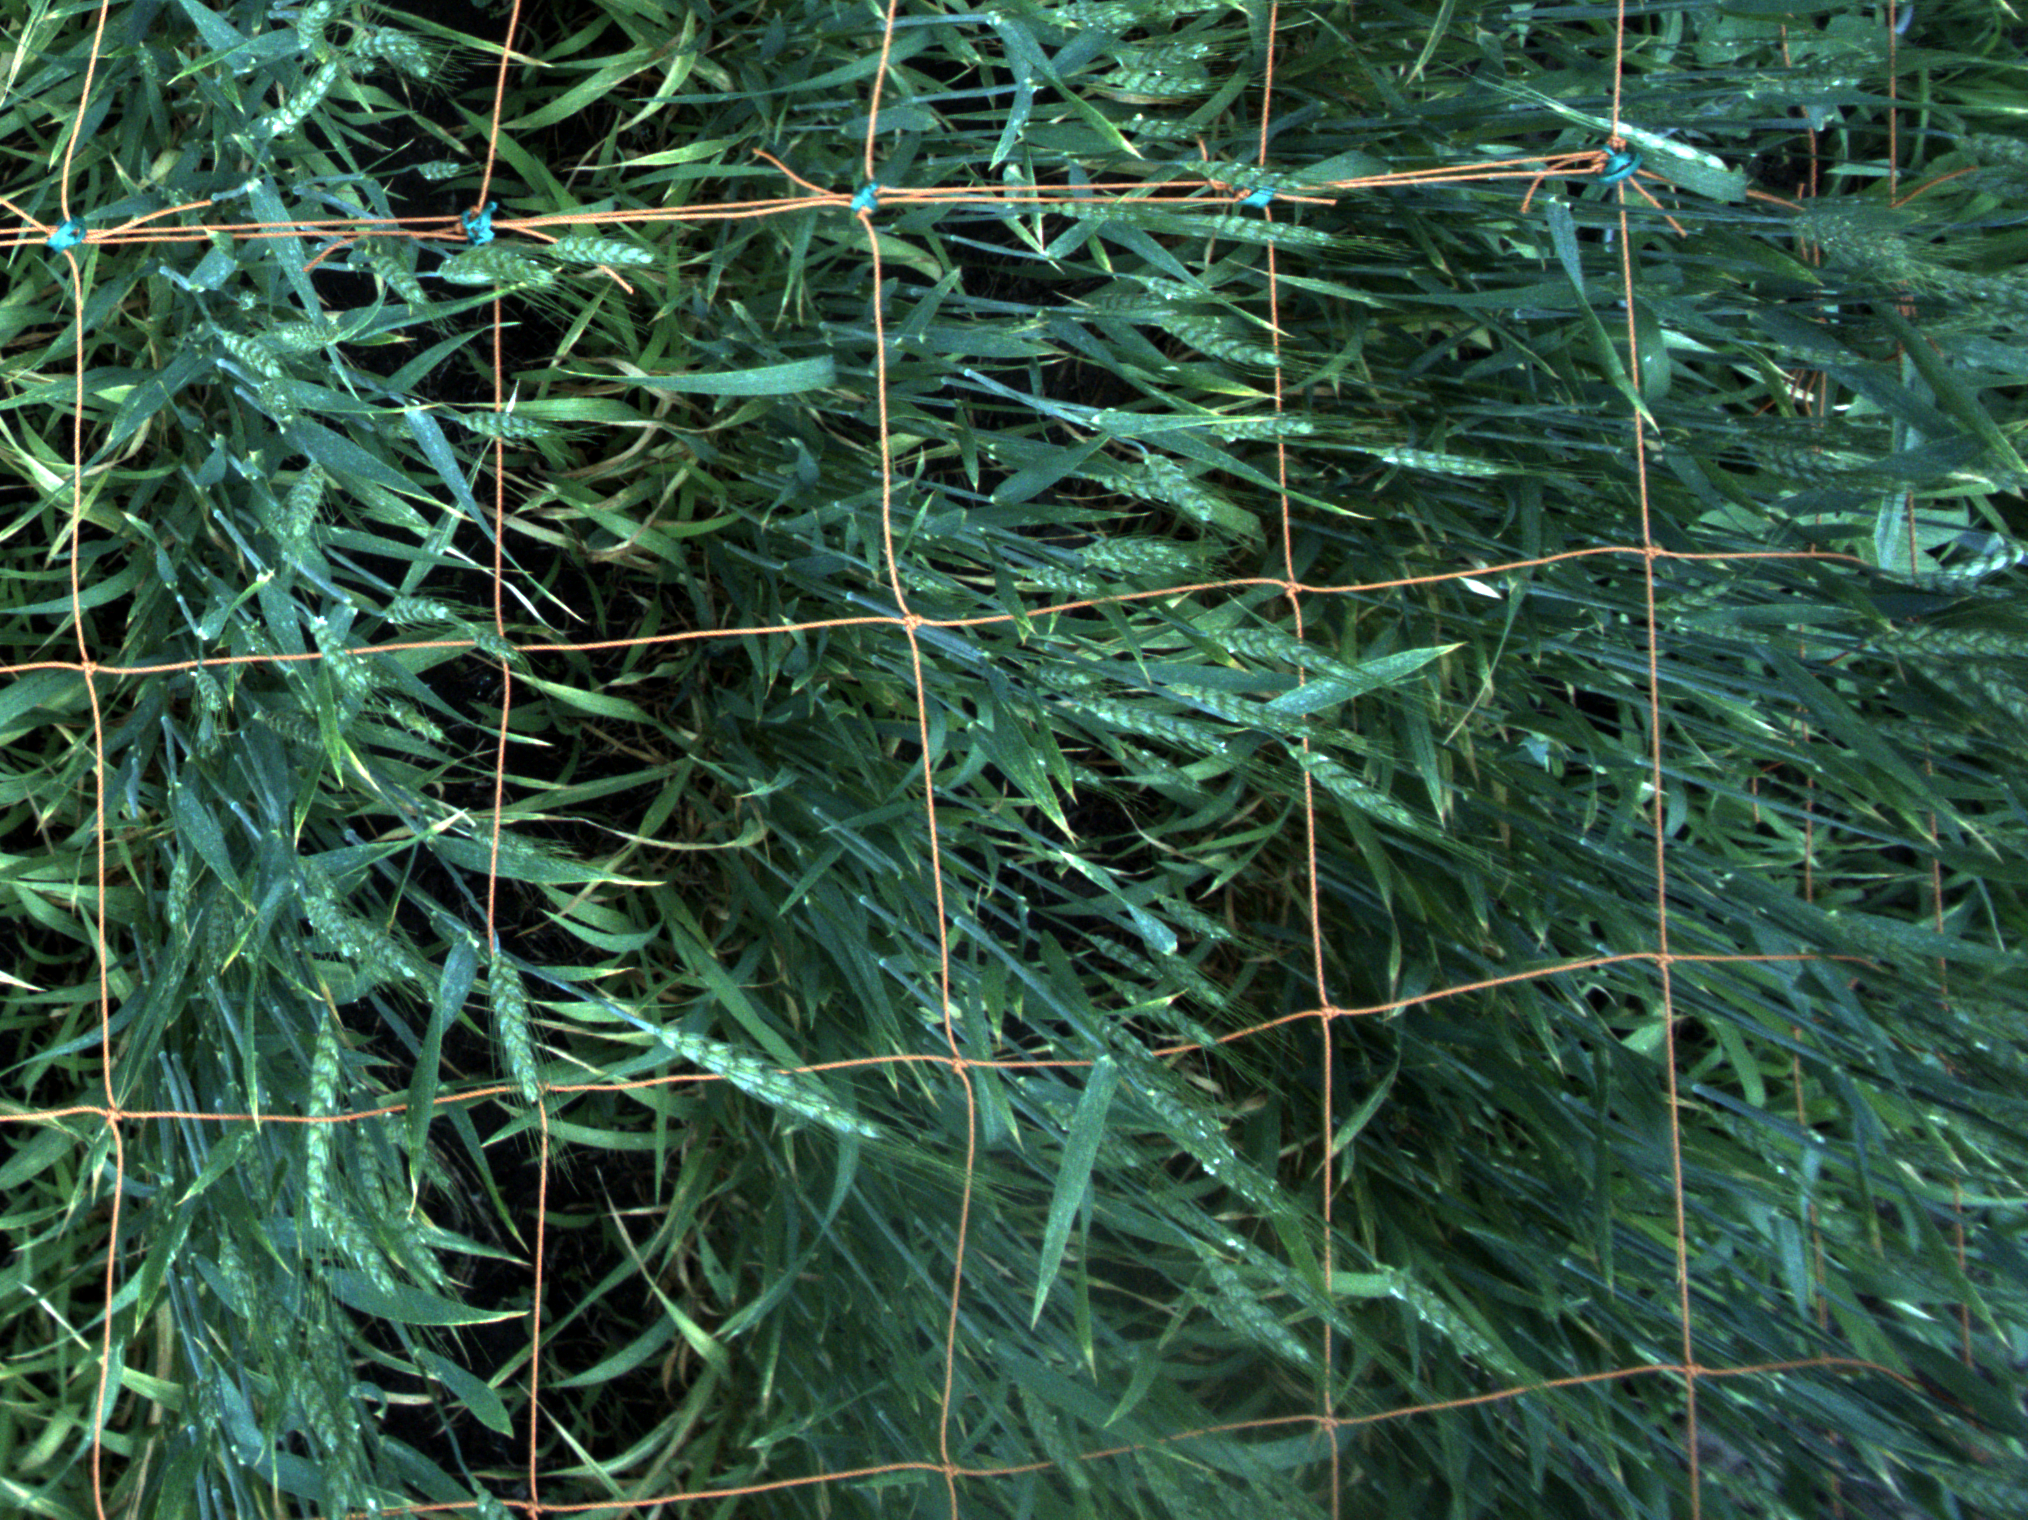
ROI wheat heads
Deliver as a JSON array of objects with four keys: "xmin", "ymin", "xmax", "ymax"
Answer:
[
  {"xmin": 239, "ymin": 1138, "xmax": 267, "ymax": 1207},
  {"xmin": 1973, "ymin": 659, "xmax": 2024, "ymax": 723},
  {"xmin": 648, "ymin": 1017, "xmax": 883, "ymax": 1140},
  {"xmin": 1562, "ymin": 487, "xmax": 1621, "ymax": 517},
  {"xmin": 267, "ymin": 506, "xmax": 285, "ymax": 538},
  {"xmin": 1150, "ymin": 277, "xmax": 1198, "ymax": 300},
  {"xmin": 1933, "ymin": 537, "xmax": 2024, "ymax": 579},
  {"xmin": 1749, "ymin": 55, "xmax": 1879, "ymax": 100},
  {"xmin": 217, "ymin": 1230, "xmax": 250, "ymax": 1305},
  {"xmin": 309, "ymin": 609, "xmax": 368, "ymax": 689},
  {"xmin": 470, "ymin": 623, "xmax": 519, "ymax": 662},
  {"xmin": 1873, "ymin": 1003, "xmax": 1965, "ymax": 1058},
  {"xmin": 1171, "ymin": 1136, "xmax": 1283, "ymax": 1203},
  {"xmin": 461, "ymin": 411, "xmax": 539, "ymax": 440},
  {"xmin": 468, "ymin": 823, "xmax": 536, "ymax": 856},
  {"xmin": 1757, "ymin": 420, "xmax": 1856, "ymax": 449},
  {"xmin": 1220, "ymin": 1228, "xmax": 1349, "ymax": 1334},
  {"xmin": 1696, "ymin": 38, "xmax": 1775, "ymax": 50},
  {"xmin": 197, "ymin": 664, "xmax": 224, "ymax": 710},
  {"xmin": 1109, "ymin": 67, "xmax": 1207, "ymax": 101},
  {"xmin": 209, "ymin": 885, "xmax": 236, "ymax": 970},
  {"xmin": 1017, "ymin": 1380, "xmax": 1092, "ymax": 1488},
  {"xmin": 265, "ymin": 705, "xmax": 325, "ymax": 746},
  {"xmin": 1218, "ymin": 416, "xmax": 1315, "ymax": 444},
  {"xmin": 1883, "ymin": 1134, "xmax": 2002, "ymax": 1185},
  {"xmin": 1755, "ymin": 437, "xmax": 1849, "ymax": 469},
  {"xmin": 1756, "ymin": 456, "xmax": 1903, "ymax": 488},
  {"xmin": 1072, "ymin": 690, "xmax": 1227, "ymax": 756},
  {"xmin": 1816, "ymin": 234, "xmax": 1908, "ymax": 273},
  {"xmin": 1838, "ymin": 313, "xmax": 1965, "ymax": 346},
  {"xmin": 1078, "ymin": 9, "xmax": 1139, "ymax": 34},
  {"xmin": 295, "ymin": 0, "xmax": 332, "ymax": 50},
  {"xmin": 345, "ymin": 914, "xmax": 415, "ymax": 982},
  {"xmin": 286, "ymin": 463, "xmax": 329, "ymax": 537},
  {"xmin": 1042, "ymin": 1099, "xmax": 1143, "ymax": 1170},
  {"xmin": 1288, "ymin": 743, "xmax": 1417, "ymax": 831},
  {"xmin": 1031, "ymin": 745, "xmax": 1099, "ymax": 784},
  {"xmin": 1127, "ymin": 1445, "xmax": 1208, "ymax": 1516},
  {"xmin": 1215, "ymin": 1478, "xmax": 1258, "ymax": 1516},
  {"xmin": 383, "ymin": 594, "xmax": 451, "ymax": 626},
  {"xmin": 385, "ymin": 1175, "xmax": 446, "ymax": 1288},
  {"xmin": 1122, "ymin": 120, "xmax": 1202, "ymax": 146},
  {"xmin": 1795, "ymin": 208, "xmax": 1856, "ymax": 239},
  {"xmin": 1088, "ymin": 932, "xmax": 1167, "ymax": 981},
  {"xmin": 440, "ymin": 261, "xmax": 494, "ymax": 284},
  {"xmin": 1117, "ymin": 1055, "xmax": 1205, "ymax": 1140},
  {"xmin": 376, "ymin": 22, "xmax": 429, "ymax": 80},
  {"xmin": 1157, "ymin": 0, "xmax": 1305, "ymax": 20},
  {"xmin": 267, "ymin": 61, "xmax": 338, "ymax": 140},
  {"xmin": 1025, "ymin": 660, "xmax": 1090, "ymax": 690},
  {"xmin": 1873, "ymin": 715, "xmax": 1967, "ymax": 751},
  {"xmin": 1386, "ymin": 1262, "xmax": 1515, "ymax": 1378},
  {"xmin": 1973, "ymin": 163, "xmax": 2027, "ymax": 201},
  {"xmin": 1380, "ymin": 442, "xmax": 1499, "ymax": 481},
  {"xmin": 1088, "ymin": 291, "xmax": 1161, "ymax": 320},
  {"xmin": 1780, "ymin": 338, "xmax": 1863, "ymax": 367},
  {"xmin": 352, "ymin": 1117, "xmax": 385, "ymax": 1222},
  {"xmin": 1925, "ymin": 263, "xmax": 2024, "ymax": 308},
  {"xmin": 192, "ymin": 1373, "xmax": 222, "ymax": 1440},
  {"xmin": 389, "ymin": 701, "xmax": 445, "ymax": 744},
  {"xmin": 1599, "ymin": 116, "xmax": 1727, "ymax": 171},
  {"xmin": 1049, "ymin": 203, "xmax": 1139, "ymax": 226},
  {"xmin": 290, "ymin": 1357, "xmax": 338, "ymax": 1448},
  {"xmin": 323, "ymin": 1400, "xmax": 360, "ymax": 1515},
  {"xmin": 379, "ymin": 414, "xmax": 417, "ymax": 442},
  {"xmin": 1086, "ymin": 1013, "xmax": 1156, "ymax": 1066},
  {"xmin": 1076, "ymin": 540, "xmax": 1191, "ymax": 580},
  {"xmin": 242, "ymin": 624, "xmax": 274, "ymax": 654},
  {"xmin": 310, "ymin": 1316, "xmax": 351, "ymax": 1396},
  {"xmin": 168, "ymin": 1213, "xmax": 192, "ymax": 1265},
  {"xmin": 1150, "ymin": 887, "xmax": 1238, "ymax": 941},
  {"xmin": 1598, "ymin": 280, "xmax": 1670, "ymax": 301},
  {"xmin": 1971, "ymin": 1093, "xmax": 2024, "ymax": 1136},
  {"xmin": 1854, "ymin": 1232, "xmax": 1965, "ymax": 1303},
  {"xmin": 236, "ymin": 290, "xmax": 258, "ymax": 313},
  {"xmin": 455, "ymin": 243, "xmax": 554, "ymax": 291},
  {"xmin": 1931, "ymin": 1463, "xmax": 2027, "ymax": 1516},
  {"xmin": 1948, "ymin": 992, "xmax": 2026, "ymax": 1037},
  {"xmin": 1196, "ymin": 158, "xmax": 1299, "ymax": 195},
  {"xmin": 1829, "ymin": 912, "xmax": 1918, "ymax": 971},
  {"xmin": 322, "ymin": 1204, "xmax": 395, "ymax": 1298},
  {"xmin": 1249, "ymin": 1455, "xmax": 1327, "ymax": 1518},
  {"xmin": 1100, "ymin": 472, "xmax": 1172, "ymax": 506},
  {"xmin": 166, "ymin": 851, "xmax": 191, "ymax": 923},
  {"xmin": 1684, "ymin": 617, "xmax": 1770, "ymax": 644},
  {"xmin": 1185, "ymin": 1289, "xmax": 1256, "ymax": 1339},
  {"xmin": 899, "ymin": 568, "xmax": 953, "ymax": 598},
  {"xmin": 1147, "ymin": 1188, "xmax": 1228, "ymax": 1244},
  {"xmin": 1139, "ymin": 453, "xmax": 1213, "ymax": 523},
  {"xmin": 1117, "ymin": 742, "xmax": 1201, "ymax": 792},
  {"xmin": 310, "ymin": 1282, "xmax": 358, "ymax": 1335},
  {"xmin": 1202, "ymin": 212, "xmax": 1329, "ymax": 251},
  {"xmin": 277, "ymin": 318, "xmax": 342, "ymax": 352},
  {"xmin": 547, "ymin": 234, "xmax": 656, "ymax": 269},
  {"xmin": 1979, "ymin": 815, "xmax": 2027, "ymax": 853},
  {"xmin": 473, "ymin": 1478, "xmax": 511, "ymax": 1518},
  {"xmin": 1136, "ymin": 40, "xmax": 1214, "ymax": 71},
  {"xmin": 1249, "ymin": 1475, "xmax": 1297, "ymax": 1519},
  {"xmin": 260, "ymin": 385, "xmax": 293, "ymax": 424},
  {"xmin": 1109, "ymin": 976, "xmax": 1215, "ymax": 1050},
  {"xmin": 1715, "ymin": 1108, "xmax": 1799, "ymax": 1183},
  {"xmin": 1060, "ymin": 0, "xmax": 1128, "ymax": 18},
  {"xmin": 1620, "ymin": 103, "xmax": 1702, "ymax": 123},
  {"xmin": 1654, "ymin": 579, "xmax": 1731, "ymax": 609},
  {"xmin": 367, "ymin": 250, "xmax": 428, "ymax": 307},
  {"xmin": 1951, "ymin": 126, "xmax": 2026, "ymax": 163},
  {"xmin": 374, "ymin": 1098, "xmax": 452, "ymax": 1187},
  {"xmin": 136, "ymin": 39, "xmax": 158, "ymax": 76},
  {"xmin": 1192, "ymin": 1240, "xmax": 1311, "ymax": 1365},
  {"xmin": 1759, "ymin": 194, "xmax": 1876, "ymax": 215},
  {"xmin": 1532, "ymin": 1269, "xmax": 1562, "ymax": 1322},
  {"xmin": 414, "ymin": 160, "xmax": 459, "ymax": 182},
  {"xmin": 486, "ymin": 950, "xmax": 541, "ymax": 1100},
  {"xmin": 157, "ymin": 1184, "xmax": 178, "ymax": 1222},
  {"xmin": 1869, "ymin": 621, "xmax": 2022, "ymax": 660},
  {"xmin": 211, "ymin": 326, "xmax": 281, "ymax": 379},
  {"xmin": 164, "ymin": 185, "xmax": 186, "ymax": 213},
  {"xmin": 355, "ymin": 24, "xmax": 421, "ymax": 63},
  {"xmin": 358, "ymin": 661, "xmax": 400, "ymax": 692},
  {"xmin": 1911, "ymin": 661, "xmax": 1973, "ymax": 708},
  {"xmin": 1714, "ymin": 1465, "xmax": 1793, "ymax": 1518},
  {"xmin": 1166, "ymin": 317, "xmax": 1278, "ymax": 364},
  {"xmin": 306, "ymin": 1018, "xmax": 342, "ymax": 1228},
  {"xmin": 1022, "ymin": 562, "xmax": 1098, "ymax": 597},
  {"xmin": 1165, "ymin": 678, "xmax": 1320, "ymax": 743},
  {"xmin": 1204, "ymin": 624, "xmax": 1343, "ymax": 677},
  {"xmin": 1905, "ymin": 579, "xmax": 2018, "ymax": 602},
  {"xmin": 252, "ymin": 1265, "xmax": 292, "ymax": 1337},
  {"xmin": 300, "ymin": 893, "xmax": 360, "ymax": 961},
  {"xmin": 344, "ymin": 54, "xmax": 376, "ymax": 76},
  {"xmin": 1159, "ymin": 950, "xmax": 1227, "ymax": 1008}
]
